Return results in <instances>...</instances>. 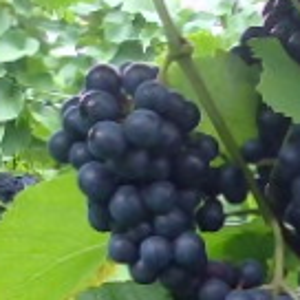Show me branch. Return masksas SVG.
Instances as JSON below:
<instances>
[{
	"label": "branch",
	"mask_w": 300,
	"mask_h": 300,
	"mask_svg": "<svg viewBox=\"0 0 300 300\" xmlns=\"http://www.w3.org/2000/svg\"><path fill=\"white\" fill-rule=\"evenodd\" d=\"M176 61L184 71L187 79L189 80L198 98L203 104L208 116L211 118L213 127L226 143L229 152L232 154L236 161V164L240 167L242 173L244 174L247 180L248 188L255 195L259 204L261 205V208L266 217V221L268 223H271L272 220H275L277 218L276 212L273 210L266 197L263 195L261 185L256 180L251 170L247 167V161L236 145L232 134L230 133L226 118L218 108L212 95L203 82V79L198 72L194 58L189 53H180L176 56Z\"/></svg>",
	"instance_id": "30e6481e"
},
{
	"label": "branch",
	"mask_w": 300,
	"mask_h": 300,
	"mask_svg": "<svg viewBox=\"0 0 300 300\" xmlns=\"http://www.w3.org/2000/svg\"><path fill=\"white\" fill-rule=\"evenodd\" d=\"M151 2L162 20V23L166 30V41L169 43V45L181 46L187 43L188 38L182 37L179 34L178 30L175 28L168 13V10L165 6L164 0H151Z\"/></svg>",
	"instance_id": "325d2c04"
}]
</instances>
